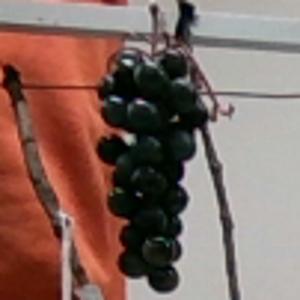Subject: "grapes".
<instances>
[{
	"label": "grapes",
	"mask_w": 300,
	"mask_h": 300,
	"mask_svg": "<svg viewBox=\"0 0 300 300\" xmlns=\"http://www.w3.org/2000/svg\"><path fill=\"white\" fill-rule=\"evenodd\" d=\"M199 67L177 47L164 50L154 64L136 46L118 51L115 65L99 77L95 94L103 104L102 123L132 136L109 132L96 138L93 151L102 165L113 168L106 208L126 220L117 233L122 247L115 261L127 279L147 277L154 291L169 295L179 285L173 263L180 260V215L190 195L180 184L185 162L197 152L196 132L209 113L199 92Z\"/></svg>",
	"instance_id": "1"
}]
</instances>
